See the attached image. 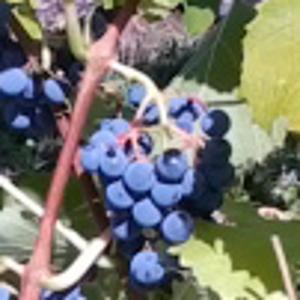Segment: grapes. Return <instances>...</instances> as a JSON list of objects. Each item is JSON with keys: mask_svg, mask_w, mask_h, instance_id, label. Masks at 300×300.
<instances>
[{"mask_svg": "<svg viewBox=\"0 0 300 300\" xmlns=\"http://www.w3.org/2000/svg\"><path fill=\"white\" fill-rule=\"evenodd\" d=\"M40 300H87V296L80 285L72 284L70 287L57 291L43 288L40 292Z\"/></svg>", "mask_w": 300, "mask_h": 300, "instance_id": "5", "label": "grapes"}, {"mask_svg": "<svg viewBox=\"0 0 300 300\" xmlns=\"http://www.w3.org/2000/svg\"><path fill=\"white\" fill-rule=\"evenodd\" d=\"M4 122L16 131H28L32 127V117L24 110L8 101L4 108Z\"/></svg>", "mask_w": 300, "mask_h": 300, "instance_id": "4", "label": "grapes"}, {"mask_svg": "<svg viewBox=\"0 0 300 300\" xmlns=\"http://www.w3.org/2000/svg\"><path fill=\"white\" fill-rule=\"evenodd\" d=\"M127 280L137 289H158L166 282L167 266L153 250L138 251L127 259Z\"/></svg>", "mask_w": 300, "mask_h": 300, "instance_id": "3", "label": "grapes"}, {"mask_svg": "<svg viewBox=\"0 0 300 300\" xmlns=\"http://www.w3.org/2000/svg\"><path fill=\"white\" fill-rule=\"evenodd\" d=\"M167 104L169 116L149 103L140 120L104 118L80 148L83 169L106 182L104 204L117 213L110 233L118 241L153 228L169 246L186 245L195 232L192 216L217 210L234 178L233 144L221 138L233 129L232 116L194 97Z\"/></svg>", "mask_w": 300, "mask_h": 300, "instance_id": "1", "label": "grapes"}, {"mask_svg": "<svg viewBox=\"0 0 300 300\" xmlns=\"http://www.w3.org/2000/svg\"><path fill=\"white\" fill-rule=\"evenodd\" d=\"M14 98L17 102H45L64 106L68 95L64 86L53 77L35 80L23 68L0 70V98Z\"/></svg>", "mask_w": 300, "mask_h": 300, "instance_id": "2", "label": "grapes"}]
</instances>
